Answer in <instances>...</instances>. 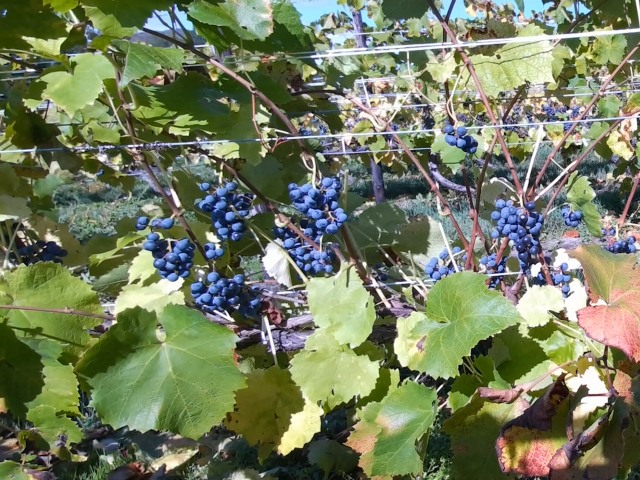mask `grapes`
<instances>
[{
    "mask_svg": "<svg viewBox=\"0 0 640 480\" xmlns=\"http://www.w3.org/2000/svg\"><path fill=\"white\" fill-rule=\"evenodd\" d=\"M37 246L43 249V252L37 253V249L34 246L23 247L21 243H16L15 247L16 252L19 256L28 255L27 257L22 258V262L25 266H29L31 263H36L39 260L43 262L53 261L59 265H63L64 261L57 257H66L68 255V251L66 249H61V247L57 244L56 241H50L46 244L44 240H38Z\"/></svg>",
    "mask_w": 640,
    "mask_h": 480,
    "instance_id": "obj_7",
    "label": "grapes"
},
{
    "mask_svg": "<svg viewBox=\"0 0 640 480\" xmlns=\"http://www.w3.org/2000/svg\"><path fill=\"white\" fill-rule=\"evenodd\" d=\"M204 254L207 259H218L224 255V250L222 248H217V246L212 242H207L203 245Z\"/></svg>",
    "mask_w": 640,
    "mask_h": 480,
    "instance_id": "obj_13",
    "label": "grapes"
},
{
    "mask_svg": "<svg viewBox=\"0 0 640 480\" xmlns=\"http://www.w3.org/2000/svg\"><path fill=\"white\" fill-rule=\"evenodd\" d=\"M453 131L454 128L450 126L449 123H447L445 127L446 134L444 135V140L448 145L456 146L458 149H462L464 153L474 154L477 152V146L479 145V142L472 135H466V127L457 126V136L452 134Z\"/></svg>",
    "mask_w": 640,
    "mask_h": 480,
    "instance_id": "obj_8",
    "label": "grapes"
},
{
    "mask_svg": "<svg viewBox=\"0 0 640 480\" xmlns=\"http://www.w3.org/2000/svg\"><path fill=\"white\" fill-rule=\"evenodd\" d=\"M205 281L210 285L205 286L201 281L190 284L191 296L195 298V304L200 307L201 312H213L216 309L219 312L226 310L231 314L236 311L231 305L239 304L238 313L247 318L260 313L264 307L261 297L254 293L260 289L258 284H253L248 292L243 291L246 283L242 273H237L230 279L217 271H210Z\"/></svg>",
    "mask_w": 640,
    "mask_h": 480,
    "instance_id": "obj_3",
    "label": "grapes"
},
{
    "mask_svg": "<svg viewBox=\"0 0 640 480\" xmlns=\"http://www.w3.org/2000/svg\"><path fill=\"white\" fill-rule=\"evenodd\" d=\"M512 200L497 199L495 208L500 211H492L490 218L498 221L496 230L491 231V238L498 239L501 235L507 236L510 241H514L517 249L520 269L524 271V276L530 273V266L537 263L531 255H538L542 251L538 237L544 221V215L538 214L535 201H528L525 205L530 214H523L521 207L512 206Z\"/></svg>",
    "mask_w": 640,
    "mask_h": 480,
    "instance_id": "obj_2",
    "label": "grapes"
},
{
    "mask_svg": "<svg viewBox=\"0 0 640 480\" xmlns=\"http://www.w3.org/2000/svg\"><path fill=\"white\" fill-rule=\"evenodd\" d=\"M439 259L432 257L428 264L425 265V274L435 280H440L444 275L456 274V268L453 262H450L446 267H437Z\"/></svg>",
    "mask_w": 640,
    "mask_h": 480,
    "instance_id": "obj_9",
    "label": "grapes"
},
{
    "mask_svg": "<svg viewBox=\"0 0 640 480\" xmlns=\"http://www.w3.org/2000/svg\"><path fill=\"white\" fill-rule=\"evenodd\" d=\"M169 243L165 239H159L157 233H150L146 236L143 249L151 252L154 260L153 266L159 269V274L170 282H175L180 278L190 277V268L194 265V250L196 249L189 237L177 239L171 243L172 253L166 248Z\"/></svg>",
    "mask_w": 640,
    "mask_h": 480,
    "instance_id": "obj_5",
    "label": "grapes"
},
{
    "mask_svg": "<svg viewBox=\"0 0 640 480\" xmlns=\"http://www.w3.org/2000/svg\"><path fill=\"white\" fill-rule=\"evenodd\" d=\"M273 234L283 235L285 239L283 247L289 250V256L295 260V264L301 271H308L310 275H317L322 270L325 273H331L333 266L326 261H333L335 259V253L331 248L326 251L317 252L306 241L300 243L297 234L292 231L288 226L273 227L271 229Z\"/></svg>",
    "mask_w": 640,
    "mask_h": 480,
    "instance_id": "obj_6",
    "label": "grapes"
},
{
    "mask_svg": "<svg viewBox=\"0 0 640 480\" xmlns=\"http://www.w3.org/2000/svg\"><path fill=\"white\" fill-rule=\"evenodd\" d=\"M496 257H497V253L493 252L489 256L482 257L480 259V263L482 265H487L489 268L495 269V272H506V269H507L506 262L508 261V257L503 256L499 264L495 263Z\"/></svg>",
    "mask_w": 640,
    "mask_h": 480,
    "instance_id": "obj_12",
    "label": "grapes"
},
{
    "mask_svg": "<svg viewBox=\"0 0 640 480\" xmlns=\"http://www.w3.org/2000/svg\"><path fill=\"white\" fill-rule=\"evenodd\" d=\"M319 187L327 189L326 192L320 193L313 184H303L301 187L297 183L287 185L292 206L307 218L315 220L314 223L301 220L299 226L304 230V235L310 237L316 244L320 243L322 234L336 235L338 228L343 227L344 222L349 218L338 203L339 190L343 188L341 179L338 176L324 177Z\"/></svg>",
    "mask_w": 640,
    "mask_h": 480,
    "instance_id": "obj_1",
    "label": "grapes"
},
{
    "mask_svg": "<svg viewBox=\"0 0 640 480\" xmlns=\"http://www.w3.org/2000/svg\"><path fill=\"white\" fill-rule=\"evenodd\" d=\"M635 241V237H629L627 241H616L612 246H606L605 250L611 251L614 255L634 253L636 251Z\"/></svg>",
    "mask_w": 640,
    "mask_h": 480,
    "instance_id": "obj_10",
    "label": "grapes"
},
{
    "mask_svg": "<svg viewBox=\"0 0 640 480\" xmlns=\"http://www.w3.org/2000/svg\"><path fill=\"white\" fill-rule=\"evenodd\" d=\"M237 188L238 184L235 181H228L224 187L215 191V195H205L197 204L199 210L211 213L210 221L212 227L218 231L219 237L222 240L230 239L233 242L243 239L247 226L242 218L250 214V201L255 199V195L250 192H244L241 195H235L231 192ZM229 203L233 204L237 215L241 218H236L232 210H227Z\"/></svg>",
    "mask_w": 640,
    "mask_h": 480,
    "instance_id": "obj_4",
    "label": "grapes"
},
{
    "mask_svg": "<svg viewBox=\"0 0 640 480\" xmlns=\"http://www.w3.org/2000/svg\"><path fill=\"white\" fill-rule=\"evenodd\" d=\"M561 216L564 218L566 226L576 227L582 220V211H573L570 206H567L562 209Z\"/></svg>",
    "mask_w": 640,
    "mask_h": 480,
    "instance_id": "obj_11",
    "label": "grapes"
}]
</instances>
